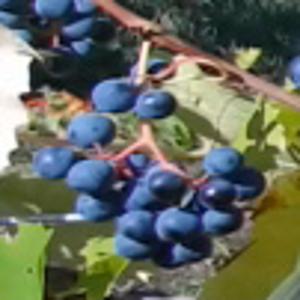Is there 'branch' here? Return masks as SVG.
<instances>
[{"label":"branch","mask_w":300,"mask_h":300,"mask_svg":"<svg viewBox=\"0 0 300 300\" xmlns=\"http://www.w3.org/2000/svg\"><path fill=\"white\" fill-rule=\"evenodd\" d=\"M93 3L98 5V10L102 14L120 23L153 47L167 50L171 56L196 62L203 74L218 78L233 86L269 96L295 111H300V97L276 84L261 80L259 75L232 62L215 57L195 44L176 38L174 34L160 28L158 25L122 8L115 0H93Z\"/></svg>","instance_id":"obj_1"}]
</instances>
